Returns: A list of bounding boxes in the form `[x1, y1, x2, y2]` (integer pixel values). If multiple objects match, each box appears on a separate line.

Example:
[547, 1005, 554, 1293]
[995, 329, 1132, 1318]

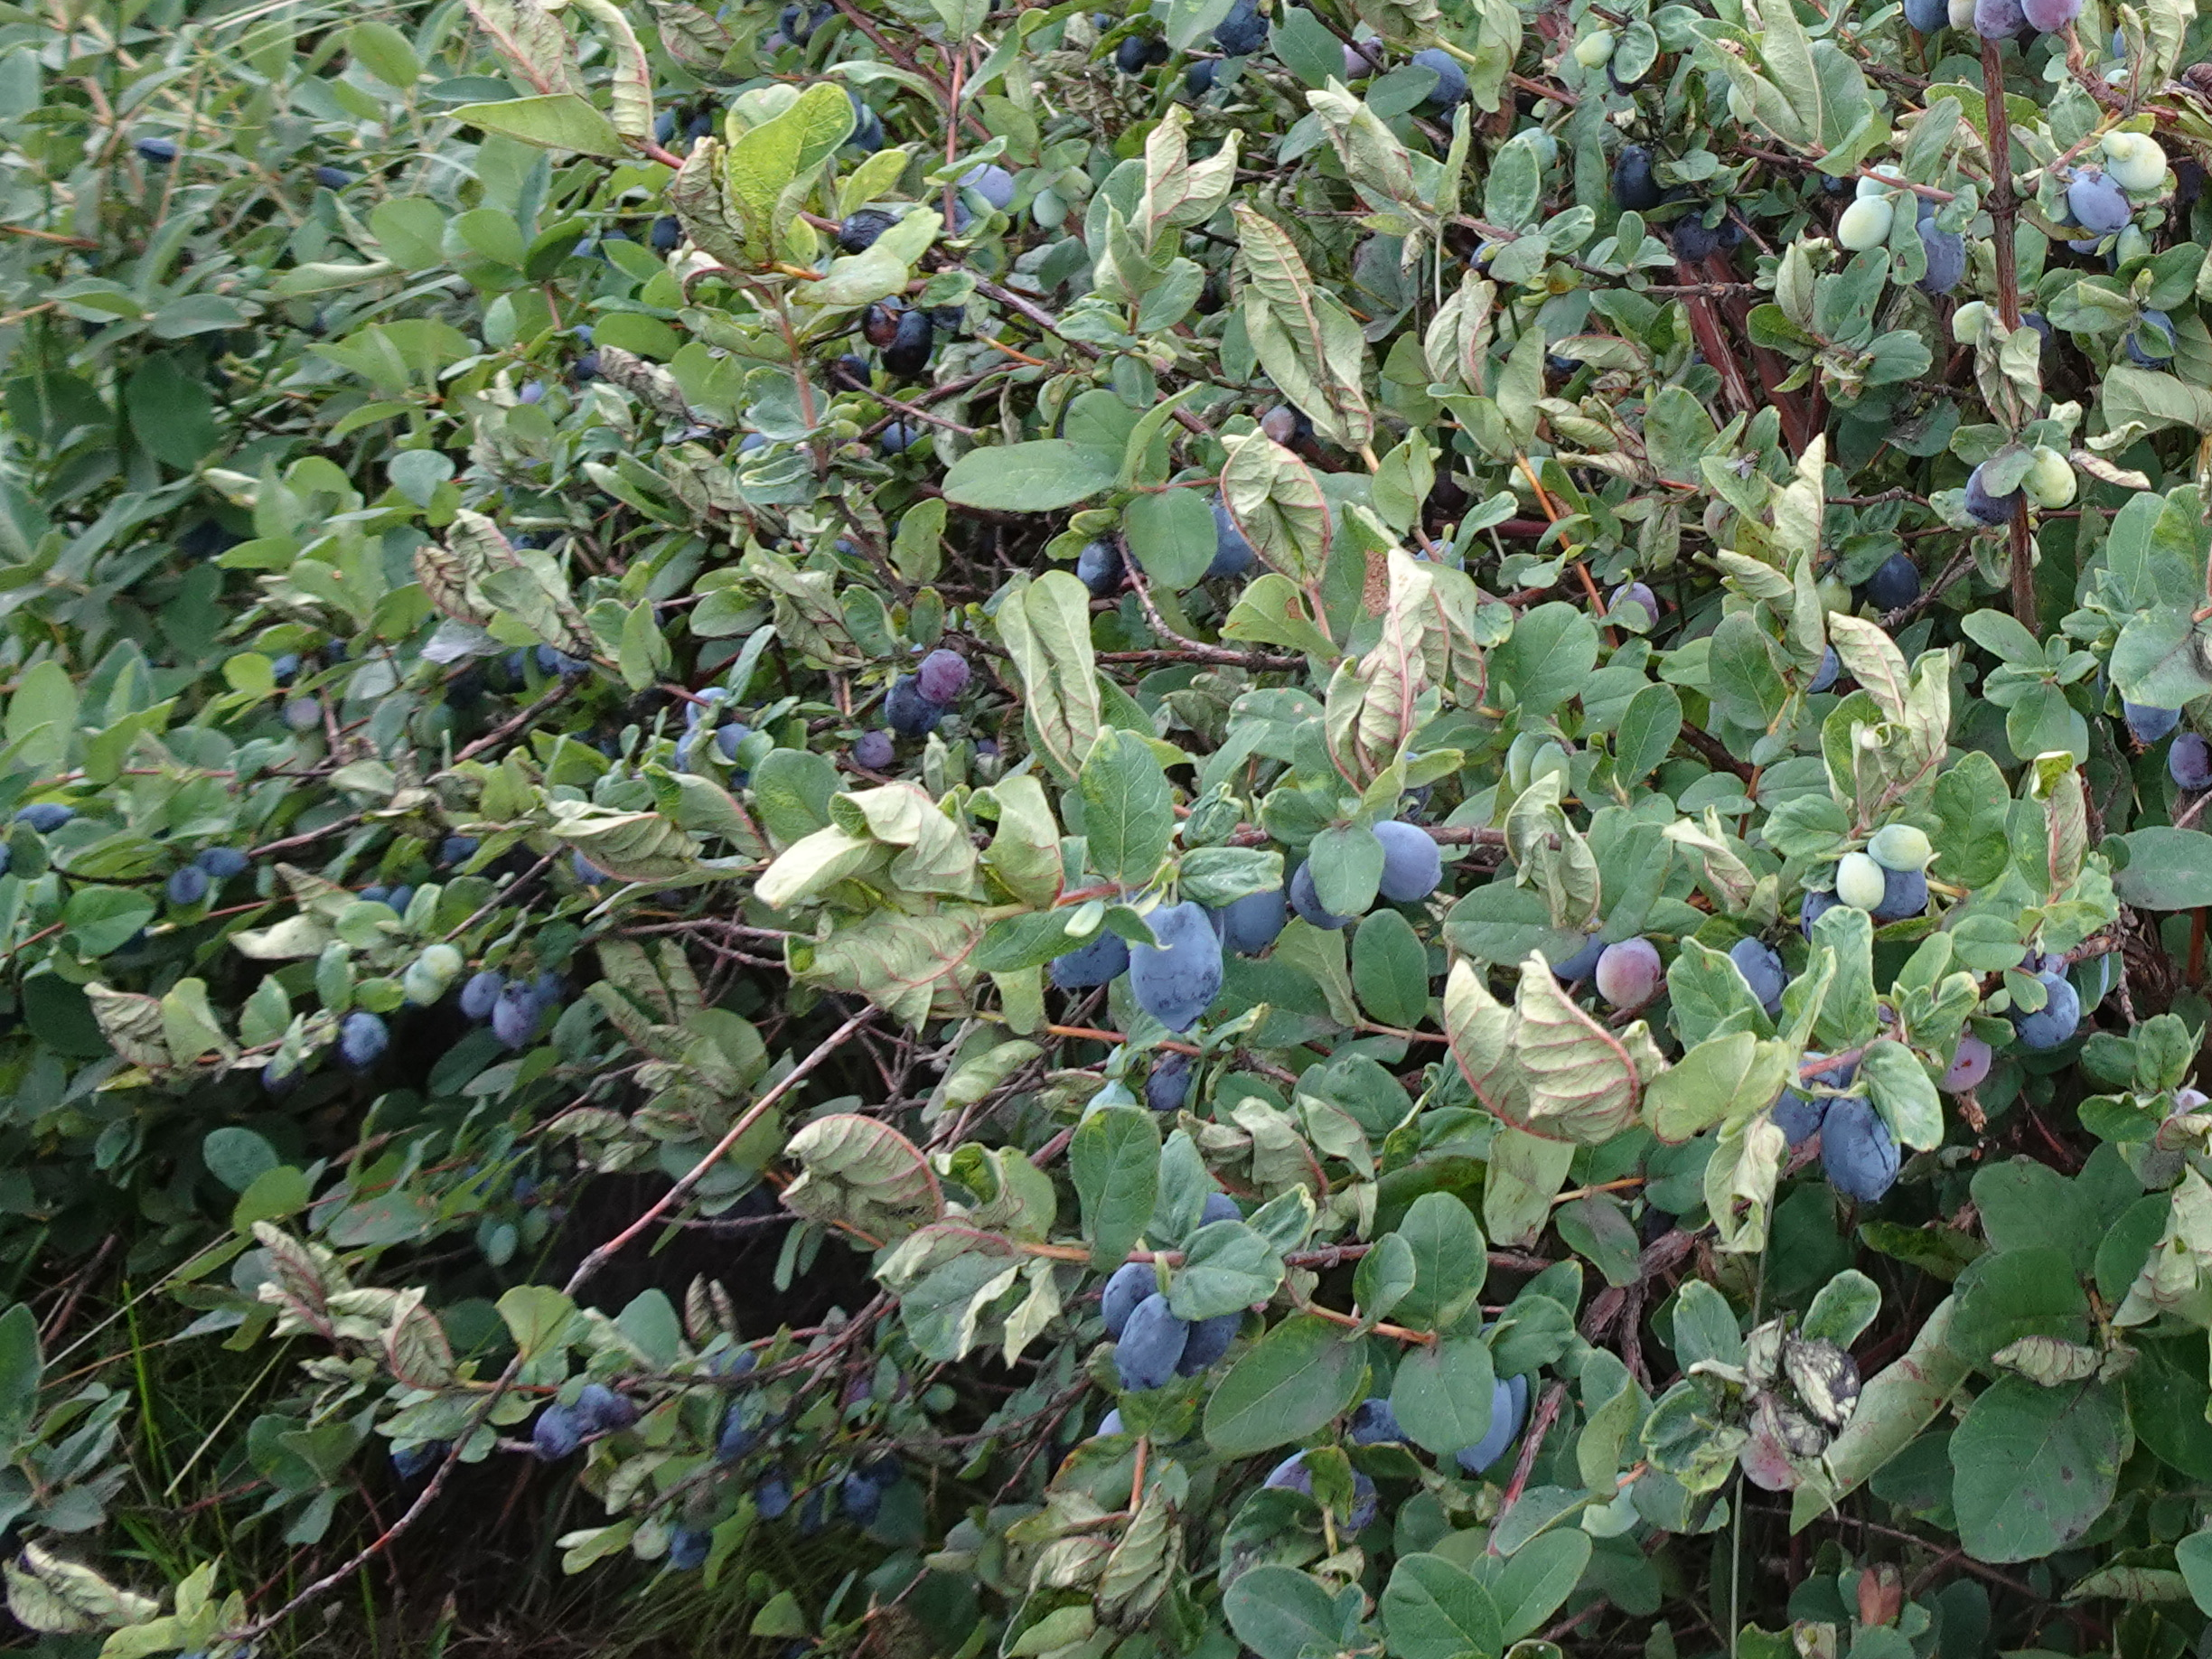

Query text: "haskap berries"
[1915, 217, 1965, 293]
[522, 1205, 547, 1244]
[260, 1056, 298, 1095]
[1837, 195, 1894, 250]
[766, 31, 791, 54]
[1097, 1408, 1126, 1439]
[458, 1164, 489, 1199]
[572, 324, 597, 350]
[392, 1439, 440, 1479]
[1114, 37, 1150, 74]
[1530, 741, 1570, 799]
[1822, 1091, 1897, 1203]
[2069, 166, 2130, 234]
[573, 851, 612, 888]
[387, 886, 414, 919]
[882, 423, 919, 452]
[1176, 1310, 1243, 1384]
[829, 420, 861, 439]
[1597, 935, 1662, 1012]
[764, 1410, 787, 1430]
[493, 982, 544, 1052]
[536, 970, 567, 1007]
[0, 842, 11, 878]
[2112, 25, 2126, 61]
[1740, 1408, 1802, 1493]
[1149, 1050, 1194, 1113]
[715, 1399, 765, 1462]
[288, 697, 320, 730]
[1508, 455, 1559, 492]
[1417, 539, 1464, 574]
[1953, 301, 1987, 343]
[674, 725, 702, 775]
[518, 383, 542, 408]
[687, 687, 730, 727]
[1837, 1059, 1860, 1089]
[1574, 29, 1615, 71]
[858, 111, 884, 151]
[650, 217, 679, 252]
[521, 457, 540, 469]
[862, 295, 902, 347]
[715, 3, 731, 23]
[405, 959, 447, 1006]
[1658, 185, 1687, 206]
[883, 672, 945, 738]
[835, 539, 866, 559]
[1112, 1292, 1188, 1391]
[2108, 133, 2167, 191]
[1289, 857, 1358, 933]
[829, 401, 860, 421]
[1294, 418, 1314, 439]
[1092, 11, 1106, 35]
[1456, 1373, 1511, 1475]
[668, 1522, 717, 1573]
[282, 705, 297, 729]
[1472, 239, 1497, 282]
[870, 1451, 905, 1487]
[544, 1204, 566, 1224]
[2127, 309, 2177, 366]
[1948, 0, 1990, 31]
[167, 866, 209, 905]
[919, 647, 973, 704]
[1800, 888, 1840, 947]
[2168, 733, 2212, 789]
[335, 1010, 389, 1063]
[1193, 279, 1222, 317]
[924, 304, 964, 331]
[956, 163, 1016, 209]
[1260, 406, 1296, 445]
[534, 1403, 579, 1456]
[685, 114, 712, 140]
[477, 1216, 496, 1254]
[1765, 972, 1790, 1014]
[1996, 311, 2026, 332]
[1342, 36, 1384, 79]
[987, 0, 1001, 12]
[13, 804, 75, 834]
[1608, 57, 1646, 96]
[1338, 1467, 1379, 1530]
[1820, 173, 1851, 198]
[1105, 1261, 1161, 1339]
[1964, 459, 2014, 526]
[937, 194, 975, 231]
[872, 1350, 900, 1407]
[1728, 935, 1779, 1006]
[1976, 0, 2023, 39]
[1704, 498, 1728, 539]
[574, 357, 599, 381]
[731, 769, 750, 790]
[658, 888, 682, 908]
[1033, 188, 1069, 227]
[2098, 661, 2109, 694]
[2123, 695, 2181, 741]
[838, 209, 903, 255]
[2021, 313, 2051, 358]
[1106, 382, 1118, 393]
[1049, 165, 1094, 201]
[1550, 929, 1601, 981]
[1718, 203, 1750, 248]
[841, 1470, 883, 1527]
[514, 1176, 535, 1200]
[600, 230, 627, 260]
[1348, 1395, 1413, 1448]
[710, 542, 731, 558]
[599, 1395, 635, 1431]
[1214, 0, 1269, 57]
[1148, 41, 1168, 65]
[2020, 0, 2076, 31]
[460, 972, 505, 1020]
[1130, 901, 1222, 1031]
[504, 645, 527, 680]
[599, 738, 619, 757]
[2102, 130, 2133, 162]
[1904, 0, 1960, 33]
[555, 648, 589, 675]
[1399, 751, 1433, 822]
[1836, 851, 1884, 911]
[1508, 732, 1553, 794]
[1757, 1052, 1842, 1146]
[1197, 1191, 1242, 1233]
[1053, 892, 1139, 991]
[313, 167, 351, 191]
[359, 887, 387, 904]
[653, 609, 664, 632]
[861, 104, 872, 132]
[1608, 582, 1658, 631]
[2104, 69, 2127, 85]
[879, 311, 932, 373]
[270, 651, 298, 676]
[1553, 353, 1584, 371]
[1868, 867, 1926, 921]
[2020, 444, 2077, 508]
[1580, 1471, 1644, 1539]
[1864, 553, 1921, 612]
[575, 722, 595, 740]
[1816, 573, 1853, 622]
[1432, 469, 1468, 510]
[1372, 820, 1441, 902]
[894, 1374, 910, 1403]
[1210, 888, 1286, 959]
[513, 534, 530, 550]
[421, 943, 464, 981]
[1503, 1374, 1530, 1448]
[444, 838, 480, 867]
[1199, 498, 1258, 579]
[487, 1224, 517, 1268]
[780, 1, 837, 48]
[1856, 165, 1906, 199]
[716, 724, 752, 763]
[851, 732, 895, 770]
[710, 1347, 757, 1379]
[755, 1466, 796, 1520]
[2117, 223, 2152, 267]
[536, 643, 559, 677]
[1807, 643, 1839, 694]
[557, 1382, 610, 1434]
[797, 1485, 834, 1533]
[324, 639, 348, 664]
[1262, 1450, 1323, 1502]
[2180, 162, 2206, 205]
[741, 433, 765, 451]
[2098, 952, 2110, 1004]
[135, 138, 178, 165]
[1411, 48, 1465, 105]
[573, 239, 594, 259]
[2055, 208, 2083, 228]
[1937, 1032, 1992, 1095]
[2014, 972, 2079, 1048]
[633, 1516, 678, 1560]
[827, 353, 873, 392]
[1915, 194, 1935, 225]
[848, 1379, 869, 1402]
[1077, 538, 1126, 596]
[841, 94, 864, 146]
[523, 1185, 538, 1209]
[1185, 58, 1224, 99]
[1670, 210, 1718, 262]
[1870, 824, 1933, 872]
[197, 848, 248, 879]
[1691, 352, 1703, 365]
[1610, 146, 1657, 212]
[2068, 233, 2106, 254]
[652, 109, 680, 150]
[979, 729, 997, 755]
[1211, 59, 1223, 88]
